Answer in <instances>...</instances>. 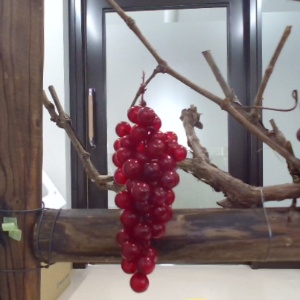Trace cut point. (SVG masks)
Instances as JSON below:
<instances>
[{
  "label": "cut point",
  "instance_id": "1",
  "mask_svg": "<svg viewBox=\"0 0 300 300\" xmlns=\"http://www.w3.org/2000/svg\"><path fill=\"white\" fill-rule=\"evenodd\" d=\"M146 91H147V87H144L143 90L140 93V96H141L140 105H141V107L146 106V101L144 100V94L146 93Z\"/></svg>",
  "mask_w": 300,
  "mask_h": 300
}]
</instances>
